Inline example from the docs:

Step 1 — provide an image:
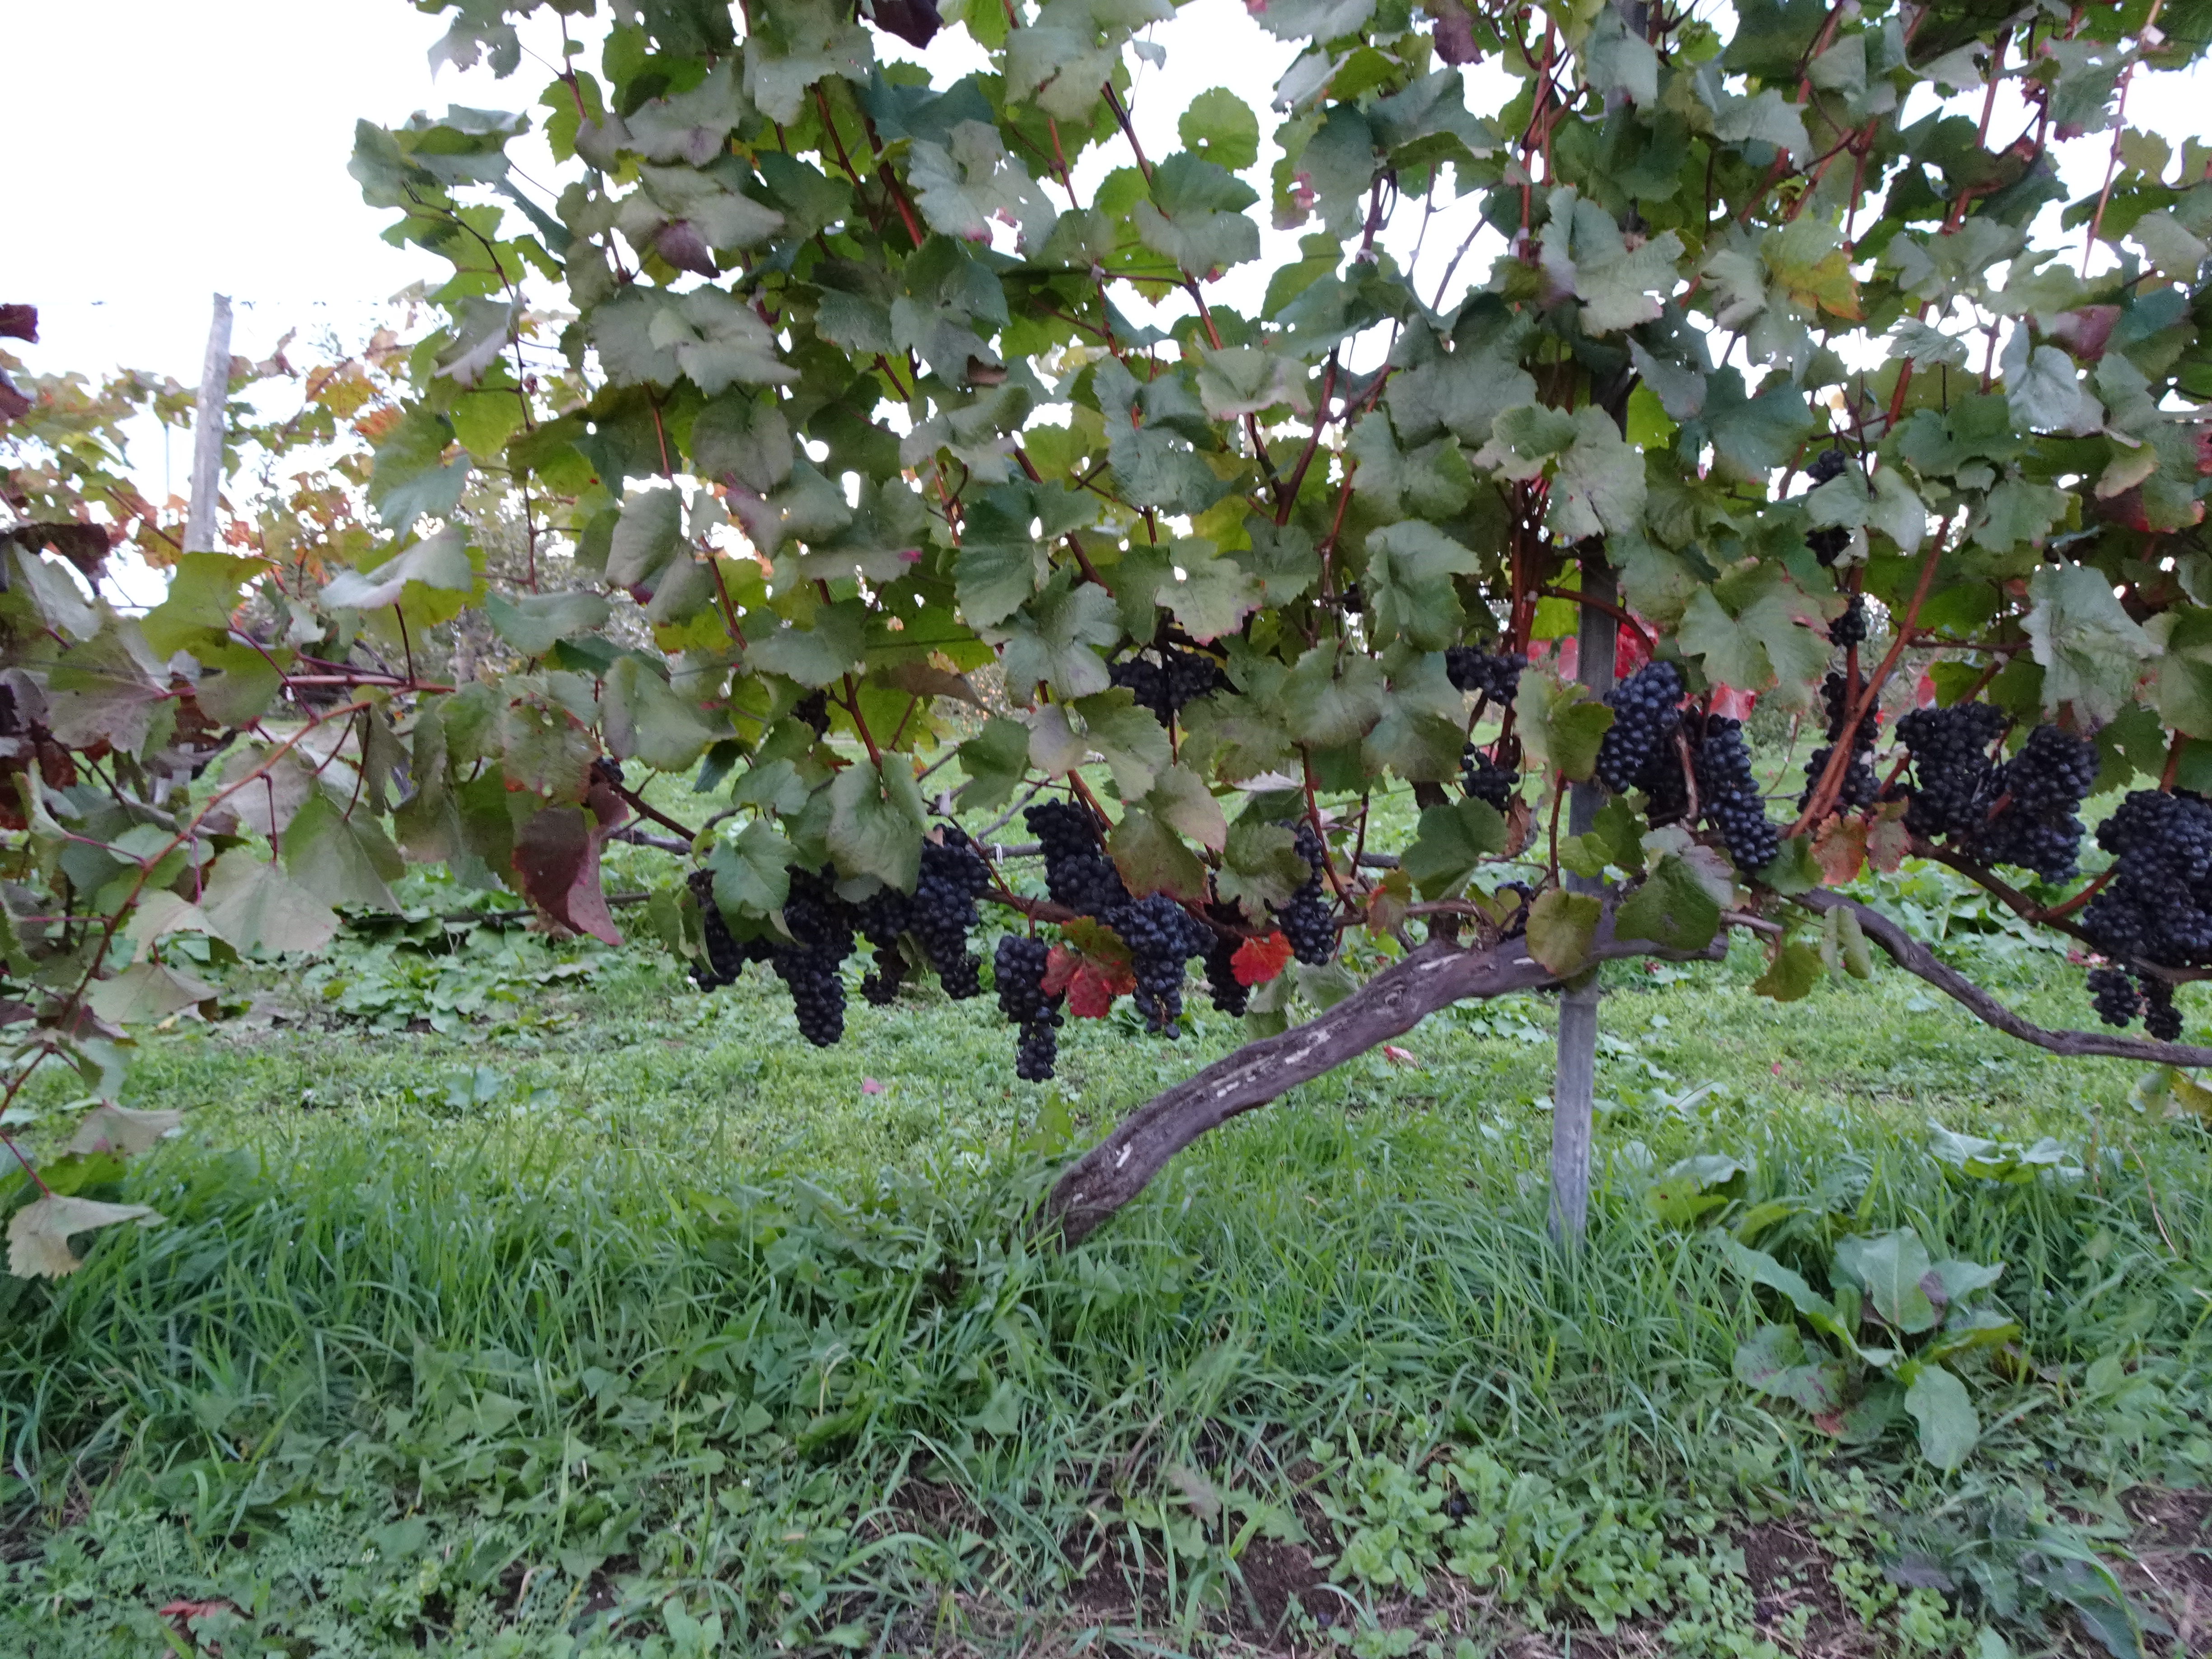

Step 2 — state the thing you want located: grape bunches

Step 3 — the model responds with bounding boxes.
[682,871,744,995]
[1021,797,1110,908]
[584,749,629,787]
[1202,890,1262,1022]
[1897,769,1992,846]
[1439,644,1493,688]
[1897,704,2008,792]
[2078,966,2142,1029]
[1458,740,1521,825]
[1679,703,1749,769]
[1279,899,1338,968]
[745,870,833,964]
[1491,878,1538,942]
[2134,971,2187,1043]
[847,885,919,1012]
[1801,444,1850,497]
[2004,724,2100,825]
[1105,892,1221,1043]
[1696,729,1778,878]
[1589,662,1683,810]
[906,825,991,929]
[1166,648,1219,714]
[2093,786,2211,876]
[2072,894,2160,962]
[1819,665,1882,748]
[1428,1472,1481,1522]
[2103,844,2212,957]
[992,932,1092,1087]
[1477,651,1527,710]
[910,913,989,1001]
[791,681,834,737]
[1955,805,2090,885]
[1053,853,1138,926]
[1800,732,1882,823]
[1108,656,1177,733]
[764,898,857,1050]
[1271,823,1328,904]
[1825,591,1869,647]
